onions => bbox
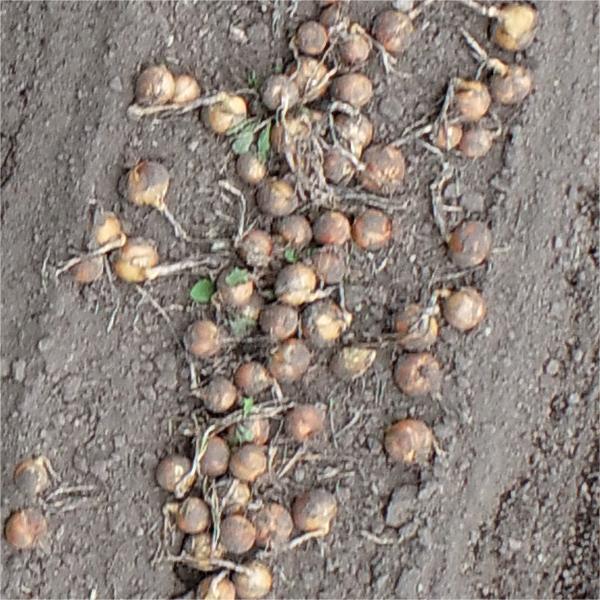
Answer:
[124,162,170,210]
[329,106,371,148]
[231,413,272,443]
[295,22,327,54]
[333,343,374,378]
[219,480,250,511]
[311,249,344,281]
[156,455,196,493]
[236,153,267,182]
[395,307,438,348]
[250,502,290,545]
[303,301,348,343]
[292,490,337,533]
[318,5,349,35]
[239,291,266,320]
[351,209,390,248]
[228,444,267,481]
[218,265,256,308]
[395,352,440,394]
[293,61,330,100]
[219,515,256,553]
[236,227,276,269]
[258,74,293,108]
[260,303,299,340]
[65,253,100,284]
[335,32,371,66]
[134,65,171,102]
[183,318,222,357]
[374,8,415,54]
[454,80,490,117]
[275,262,319,306]
[490,5,537,50]
[14,454,51,494]
[201,572,234,599]
[446,221,490,265]
[92,213,124,246]
[273,111,312,153]
[490,66,530,104]
[385,418,439,464]
[233,360,271,396]
[435,124,463,153]
[231,560,270,595]
[112,241,155,281]
[441,288,483,330]
[332,71,372,107]
[257,177,297,215]
[360,145,404,191]
[199,375,236,411]
[169,71,198,100]
[461,120,493,156]
[174,498,210,532]
[322,147,357,183]
[3,510,43,548]
[268,340,309,380]
[184,529,222,569]
[285,402,324,441]
[272,213,310,249]
[199,447,228,476]
[206,93,246,132]
[313,211,349,247]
